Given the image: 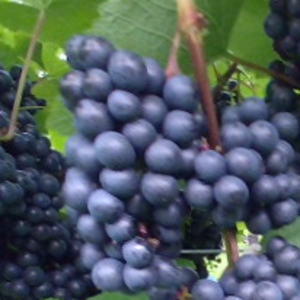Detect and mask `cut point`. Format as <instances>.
Instances as JSON below:
<instances>
[{"mask_svg": "<svg viewBox=\"0 0 300 300\" xmlns=\"http://www.w3.org/2000/svg\"><path fill=\"white\" fill-rule=\"evenodd\" d=\"M184 32L183 24L181 21L177 22L173 42L167 56V68L165 77L169 78L171 75L176 74L178 70V48L181 43V37Z\"/></svg>", "mask_w": 300, "mask_h": 300, "instance_id": "obj_1", "label": "cut point"}]
</instances>
